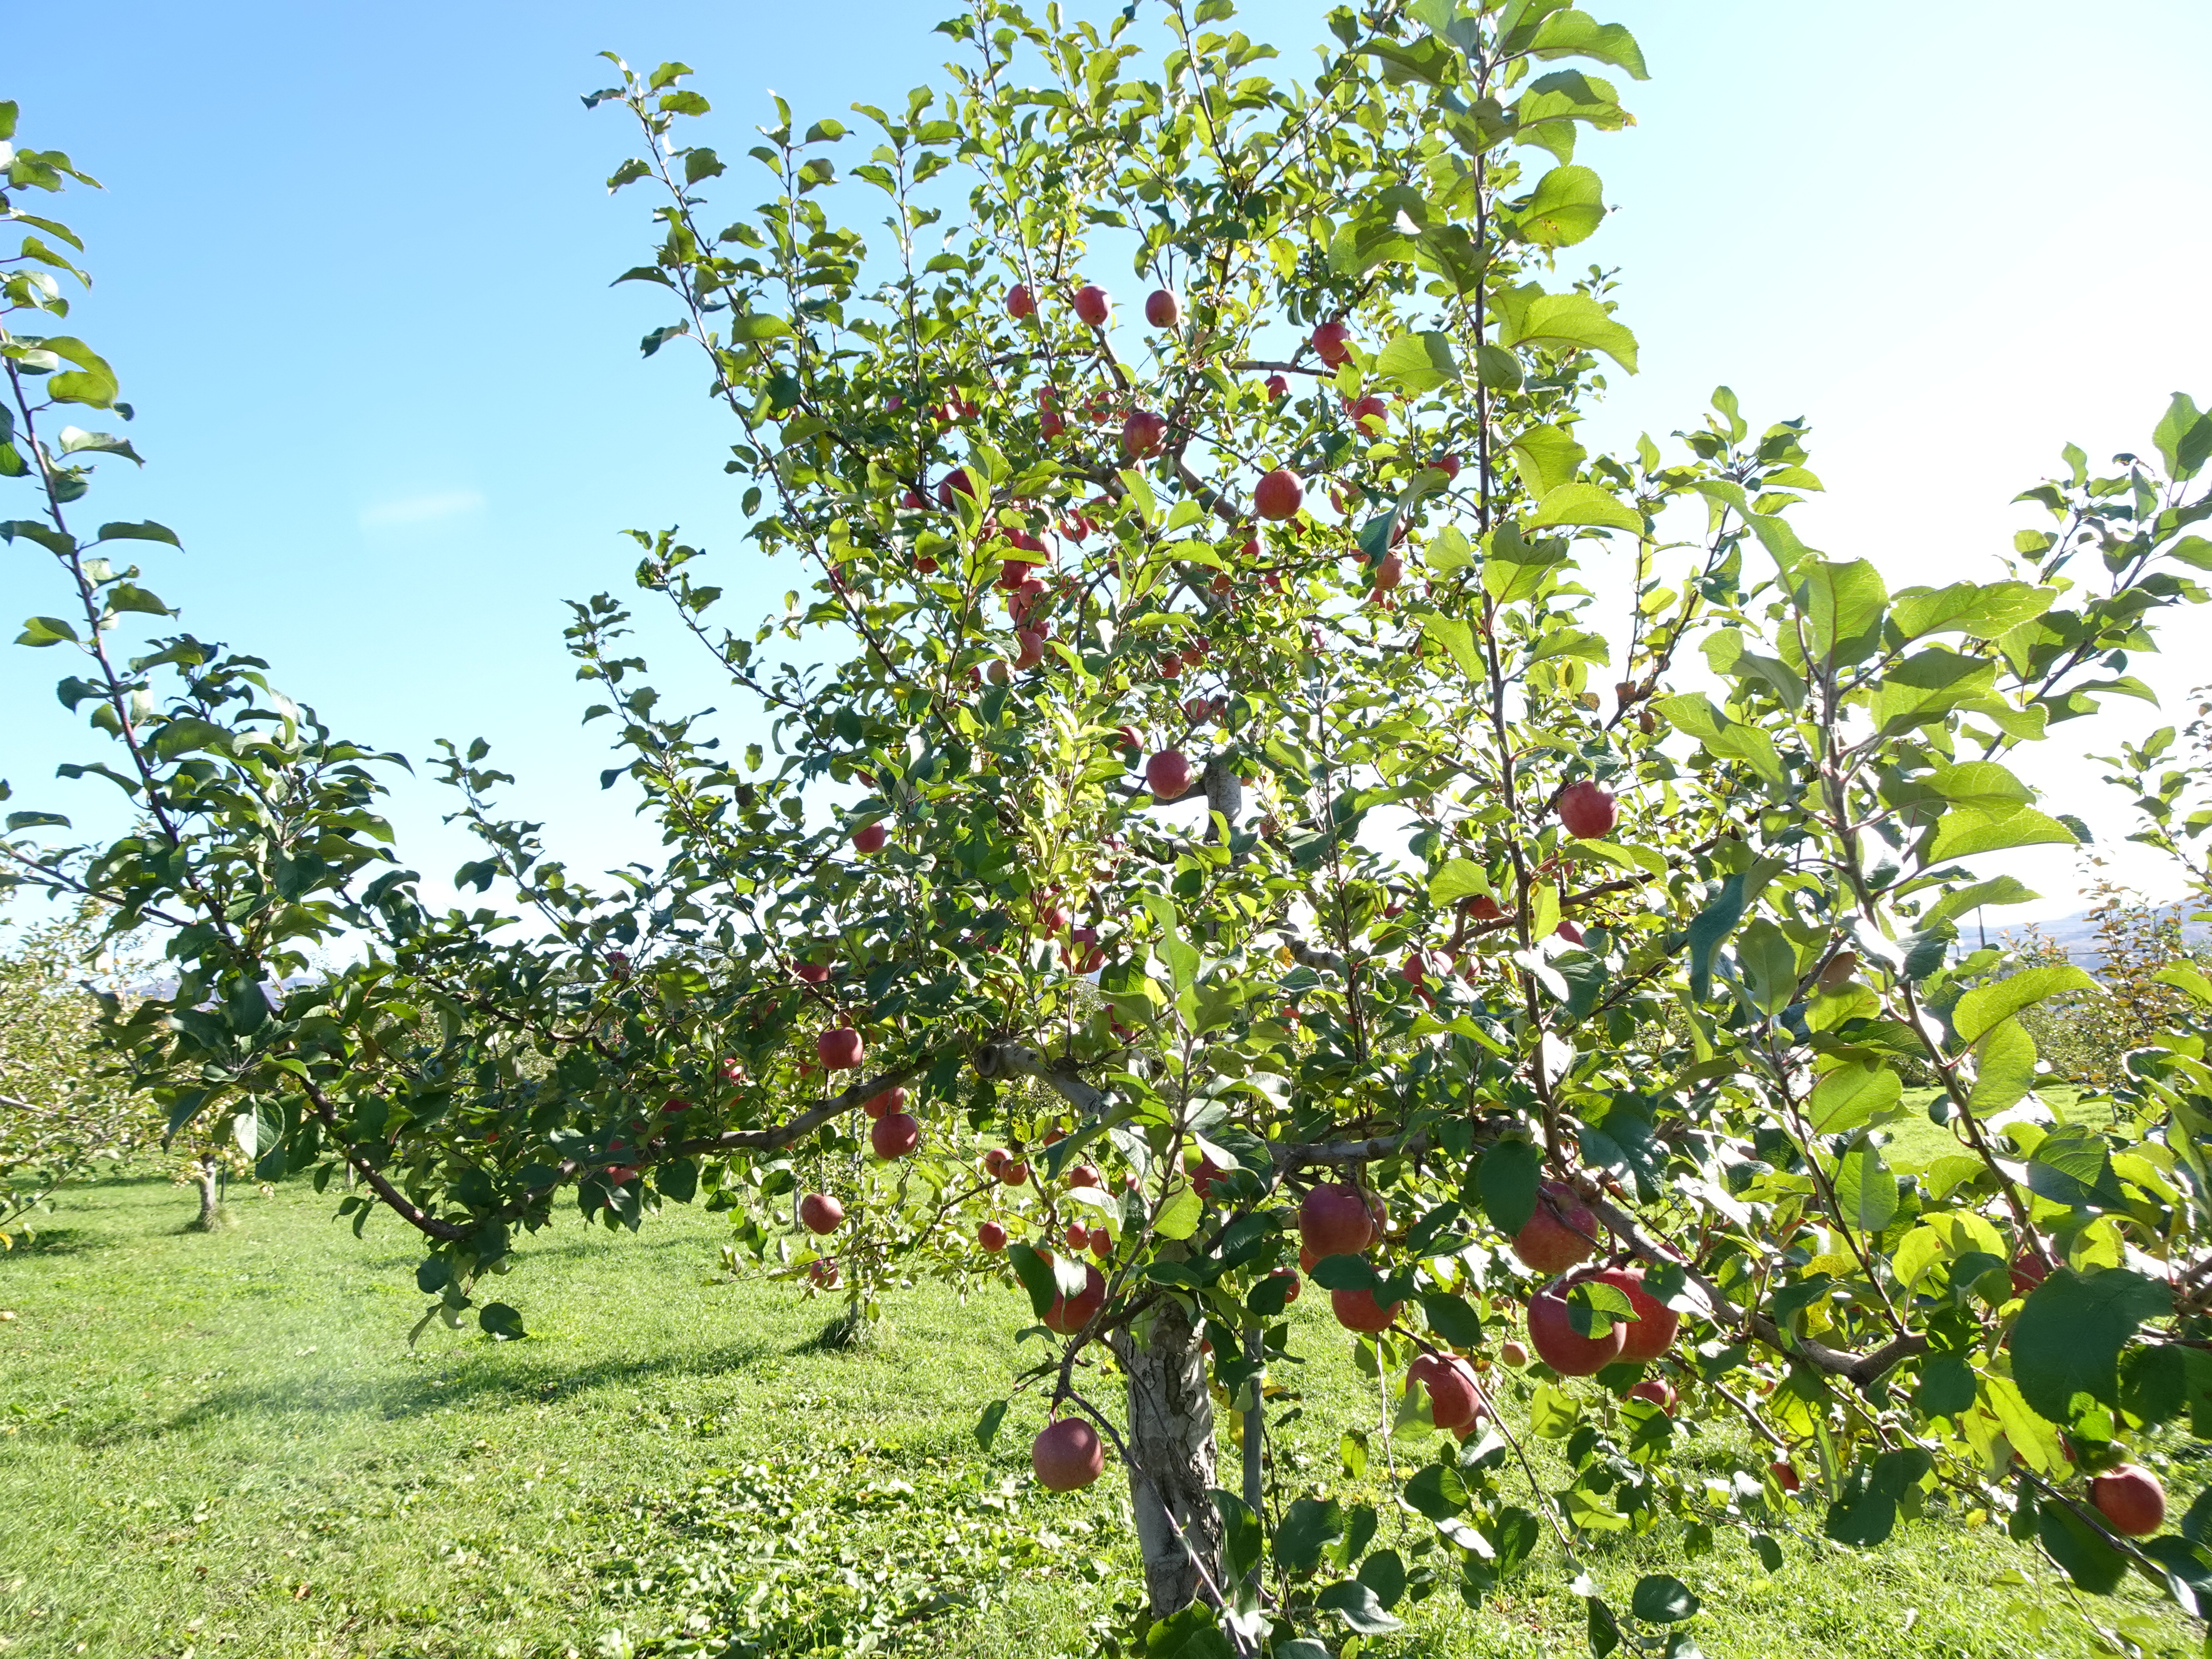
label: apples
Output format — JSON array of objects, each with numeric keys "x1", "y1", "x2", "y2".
[
  {"x1": 1107, "y1": 560, "x2": 1133, "y2": 581},
  {"x1": 1074, "y1": 285, "x2": 1113, "y2": 326},
  {"x1": 1768, "y1": 1461, "x2": 1800, "y2": 1494},
  {"x1": 1023, "y1": 505, "x2": 1050, "y2": 533},
  {"x1": 603, "y1": 1166, "x2": 636, "y2": 1206},
  {"x1": 913, "y1": 552, "x2": 938, "y2": 573},
  {"x1": 1116, "y1": 462, "x2": 1145, "y2": 483},
  {"x1": 997, "y1": 560, "x2": 1029, "y2": 590},
  {"x1": 1374, "y1": 551, "x2": 1404, "y2": 589},
  {"x1": 1332, "y1": 1265, "x2": 1401, "y2": 1333},
  {"x1": 1416, "y1": 644, "x2": 1446, "y2": 660},
  {"x1": 1240, "y1": 539, "x2": 1259, "y2": 559},
  {"x1": 1001, "y1": 527, "x2": 1026, "y2": 548},
  {"x1": 1369, "y1": 588, "x2": 1394, "y2": 611},
  {"x1": 607, "y1": 1140, "x2": 645, "y2": 1171},
  {"x1": 1478, "y1": 617, "x2": 1494, "y2": 634},
  {"x1": 1040, "y1": 424, "x2": 1064, "y2": 443},
  {"x1": 1167, "y1": 1134, "x2": 1203, "y2": 1172},
  {"x1": 1510, "y1": 1181, "x2": 1599, "y2": 1274},
  {"x1": 1284, "y1": 518, "x2": 1307, "y2": 538},
  {"x1": 1477, "y1": 630, "x2": 1488, "y2": 645},
  {"x1": 887, "y1": 396, "x2": 904, "y2": 412},
  {"x1": 1060, "y1": 508, "x2": 1089, "y2": 542},
  {"x1": 973, "y1": 517, "x2": 997, "y2": 543},
  {"x1": 901, "y1": 491, "x2": 934, "y2": 510},
  {"x1": 1044, "y1": 1127, "x2": 1068, "y2": 1147},
  {"x1": 1453, "y1": 1404, "x2": 1490, "y2": 1443},
  {"x1": 1033, "y1": 1418, "x2": 1104, "y2": 1491},
  {"x1": 962, "y1": 936, "x2": 999, "y2": 953},
  {"x1": 797, "y1": 1058, "x2": 817, "y2": 1078},
  {"x1": 1268, "y1": 1267, "x2": 1300, "y2": 1303},
  {"x1": 1103, "y1": 1004, "x2": 1133, "y2": 1039},
  {"x1": 1428, "y1": 454, "x2": 1460, "y2": 481},
  {"x1": 1085, "y1": 495, "x2": 1117, "y2": 533},
  {"x1": 1196, "y1": 564, "x2": 1206, "y2": 572},
  {"x1": 1251, "y1": 579, "x2": 1266, "y2": 606},
  {"x1": 954, "y1": 401, "x2": 980, "y2": 419},
  {"x1": 1308, "y1": 623, "x2": 1325, "y2": 657},
  {"x1": 1350, "y1": 547, "x2": 1368, "y2": 562},
  {"x1": 1070, "y1": 1165, "x2": 1099, "y2": 1188},
  {"x1": 1527, "y1": 1283, "x2": 1627, "y2": 1376},
  {"x1": 1425, "y1": 573, "x2": 1439, "y2": 597},
  {"x1": 1587, "y1": 1267, "x2": 1679, "y2": 1359},
  {"x1": 978, "y1": 1221, "x2": 1007, "y2": 1252},
  {"x1": 839, "y1": 1010, "x2": 854, "y2": 1027},
  {"x1": 949, "y1": 383, "x2": 960, "y2": 401},
  {"x1": 1145, "y1": 290, "x2": 1181, "y2": 327},
  {"x1": 828, "y1": 563, "x2": 853, "y2": 593},
  {"x1": 488, "y1": 1133, "x2": 498, "y2": 1143},
  {"x1": 1157, "y1": 653, "x2": 1182, "y2": 678},
  {"x1": 1020, "y1": 535, "x2": 1050, "y2": 568},
  {"x1": 1501, "y1": 1341, "x2": 1528, "y2": 1367},
  {"x1": 1176, "y1": 414, "x2": 1195, "y2": 442},
  {"x1": 1384, "y1": 903, "x2": 1403, "y2": 919},
  {"x1": 1181, "y1": 639, "x2": 1210, "y2": 666},
  {"x1": 1260, "y1": 814, "x2": 1277, "y2": 836},
  {"x1": 1092, "y1": 840, "x2": 1125, "y2": 879},
  {"x1": 605, "y1": 951, "x2": 631, "y2": 980},
  {"x1": 864, "y1": 1086, "x2": 904, "y2": 1119},
  {"x1": 1048, "y1": 640, "x2": 1067, "y2": 665},
  {"x1": 987, "y1": 660, "x2": 1014, "y2": 686},
  {"x1": 1264, "y1": 375, "x2": 1288, "y2": 403},
  {"x1": 2092, "y1": 1463, "x2": 2165, "y2": 1535},
  {"x1": 1041, "y1": 411, "x2": 1060, "y2": 426},
  {"x1": 968, "y1": 931, "x2": 986, "y2": 936},
  {"x1": 866, "y1": 1027, "x2": 886, "y2": 1045},
  {"x1": 1146, "y1": 749, "x2": 1191, "y2": 799},
  {"x1": 1280, "y1": 1007, "x2": 1301, "y2": 1032},
  {"x1": 1402, "y1": 951, "x2": 1454, "y2": 1006},
  {"x1": 992, "y1": 375, "x2": 1007, "y2": 388},
  {"x1": 772, "y1": 1124, "x2": 794, "y2": 1150},
  {"x1": 1299, "y1": 1244, "x2": 1320, "y2": 1275},
  {"x1": 2058, "y1": 1432, "x2": 2075, "y2": 1461},
  {"x1": 956, "y1": 666, "x2": 981, "y2": 692},
  {"x1": 1468, "y1": 882, "x2": 1508, "y2": 919},
  {"x1": 810, "y1": 1258, "x2": 838, "y2": 1287},
  {"x1": 661, "y1": 1098, "x2": 691, "y2": 1133},
  {"x1": 1013, "y1": 664, "x2": 1027, "y2": 670},
  {"x1": 871, "y1": 1113, "x2": 918, "y2": 1160},
  {"x1": 1188, "y1": 1152, "x2": 1227, "y2": 1201},
  {"x1": 1037, "y1": 907, "x2": 1060, "y2": 941},
  {"x1": 1312, "y1": 322, "x2": 1349, "y2": 360},
  {"x1": 1539, "y1": 849, "x2": 1574, "y2": 879},
  {"x1": 1390, "y1": 524, "x2": 1404, "y2": 547},
  {"x1": 1632, "y1": 1379, "x2": 1677, "y2": 1418},
  {"x1": 939, "y1": 468, "x2": 976, "y2": 509},
  {"x1": 1342, "y1": 396, "x2": 1368, "y2": 415},
  {"x1": 1032, "y1": 884, "x2": 1060, "y2": 908},
  {"x1": 1207, "y1": 565, "x2": 1233, "y2": 595},
  {"x1": 857, "y1": 769, "x2": 878, "y2": 788},
  {"x1": 1061, "y1": 929, "x2": 1103, "y2": 973},
  {"x1": 1084, "y1": 392, "x2": 1111, "y2": 423},
  {"x1": 718, "y1": 1058, "x2": 746, "y2": 1080},
  {"x1": 1751, "y1": 1362, "x2": 1775, "y2": 1396},
  {"x1": 1113, "y1": 725, "x2": 1144, "y2": 753},
  {"x1": 1365, "y1": 1196, "x2": 1387, "y2": 1249},
  {"x1": 1184, "y1": 698, "x2": 1207, "y2": 719},
  {"x1": 1607, "y1": 1182, "x2": 1629, "y2": 1201},
  {"x1": 632, "y1": 1119, "x2": 657, "y2": 1141},
  {"x1": 801, "y1": 1192, "x2": 842, "y2": 1235},
  {"x1": 1406, "y1": 1352, "x2": 1480, "y2": 1429},
  {"x1": 1008, "y1": 593, "x2": 1030, "y2": 621},
  {"x1": 1393, "y1": 393, "x2": 1415, "y2": 405},
  {"x1": 1209, "y1": 699, "x2": 1227, "y2": 728},
  {"x1": 1352, "y1": 397, "x2": 1388, "y2": 436},
  {"x1": 1504, "y1": 962, "x2": 1522, "y2": 986},
  {"x1": 1014, "y1": 631, "x2": 1044, "y2": 666},
  {"x1": 1615, "y1": 1384, "x2": 1635, "y2": 1403},
  {"x1": 1558, "y1": 779, "x2": 1619, "y2": 838},
  {"x1": 1320, "y1": 329, "x2": 1353, "y2": 369},
  {"x1": 1123, "y1": 412, "x2": 1167, "y2": 459},
  {"x1": 977, "y1": 976, "x2": 1007, "y2": 994},
  {"x1": 1449, "y1": 953, "x2": 1481, "y2": 985},
  {"x1": 1299, "y1": 1183, "x2": 1373, "y2": 1258},
  {"x1": 1255, "y1": 470, "x2": 1304, "y2": 521},
  {"x1": 785, "y1": 956, "x2": 829, "y2": 987},
  {"x1": 1066, "y1": 1221, "x2": 1090, "y2": 1250},
  {"x1": 1044, "y1": 1261, "x2": 1106, "y2": 1335},
  {"x1": 1017, "y1": 610, "x2": 1047, "y2": 640},
  {"x1": 1090, "y1": 1227, "x2": 1113, "y2": 1259},
  {"x1": 2009, "y1": 1254, "x2": 2045, "y2": 1298},
  {"x1": 1331, "y1": 480, "x2": 1360, "y2": 515},
  {"x1": 729, "y1": 1081, "x2": 741, "y2": 1106},
  {"x1": 1240, "y1": 778, "x2": 1252, "y2": 786},
  {"x1": 1230, "y1": 591, "x2": 1240, "y2": 611},
  {"x1": 928, "y1": 403, "x2": 956, "y2": 434},
  {"x1": 1060, "y1": 574, "x2": 1079, "y2": 602},
  {"x1": 1116, "y1": 398, "x2": 1131, "y2": 419},
  {"x1": 818, "y1": 1027, "x2": 863, "y2": 1070},
  {"x1": 1109, "y1": 1174, "x2": 1140, "y2": 1199},
  {"x1": 1171, "y1": 1174, "x2": 1195, "y2": 1193},
  {"x1": 1000, "y1": 1158, "x2": 1029, "y2": 1186},
  {"x1": 1554, "y1": 920, "x2": 1587, "y2": 948},
  {"x1": 852, "y1": 821, "x2": 886, "y2": 853},
  {"x1": 1016, "y1": 1248, "x2": 1054, "y2": 1288},
  {"x1": 752, "y1": 1002, "x2": 776, "y2": 1026},
  {"x1": 985, "y1": 1148, "x2": 1013, "y2": 1178},
  {"x1": 2002, "y1": 1432, "x2": 2029, "y2": 1465},
  {"x1": 1263, "y1": 571, "x2": 1292, "y2": 602},
  {"x1": 1007, "y1": 284, "x2": 1040, "y2": 319},
  {"x1": 1191, "y1": 1337, "x2": 1212, "y2": 1355},
  {"x1": 949, "y1": 699, "x2": 962, "y2": 709},
  {"x1": 1019, "y1": 578, "x2": 1050, "y2": 608},
  {"x1": 1038, "y1": 386, "x2": 1056, "y2": 411},
  {"x1": 2019, "y1": 1236, "x2": 2056, "y2": 1268},
  {"x1": 1301, "y1": 637, "x2": 1319, "y2": 657}
]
